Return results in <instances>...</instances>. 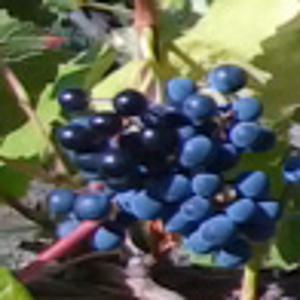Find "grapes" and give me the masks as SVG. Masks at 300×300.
Returning a JSON list of instances; mask_svg holds the SVG:
<instances>
[{
	"label": "grapes",
	"mask_w": 300,
	"mask_h": 300,
	"mask_svg": "<svg viewBox=\"0 0 300 300\" xmlns=\"http://www.w3.org/2000/svg\"><path fill=\"white\" fill-rule=\"evenodd\" d=\"M58 106L65 113H78L89 107L91 98L79 86H67L57 95Z\"/></svg>",
	"instance_id": "obj_4"
},
{
	"label": "grapes",
	"mask_w": 300,
	"mask_h": 300,
	"mask_svg": "<svg viewBox=\"0 0 300 300\" xmlns=\"http://www.w3.org/2000/svg\"><path fill=\"white\" fill-rule=\"evenodd\" d=\"M281 178L288 185L300 183V158L289 157L285 159L282 165Z\"/></svg>",
	"instance_id": "obj_5"
},
{
	"label": "grapes",
	"mask_w": 300,
	"mask_h": 300,
	"mask_svg": "<svg viewBox=\"0 0 300 300\" xmlns=\"http://www.w3.org/2000/svg\"><path fill=\"white\" fill-rule=\"evenodd\" d=\"M197 92L189 77L168 80L165 96L153 102L135 89L120 91L116 114H79L58 127V148L74 153V169L95 190L47 193V210L66 216L56 237L69 239L82 222L106 217L113 202L120 221L162 219L166 230L183 235L187 249L222 268L248 262L250 246L240 234L254 243L270 240L283 205L269 199L267 172L249 169L234 184L221 174L246 153L273 147V132L256 120L264 105L244 98L218 106Z\"/></svg>",
	"instance_id": "obj_1"
},
{
	"label": "grapes",
	"mask_w": 300,
	"mask_h": 300,
	"mask_svg": "<svg viewBox=\"0 0 300 300\" xmlns=\"http://www.w3.org/2000/svg\"><path fill=\"white\" fill-rule=\"evenodd\" d=\"M123 233L118 227L100 223L96 225L94 232L88 238L90 249L96 253H109L121 245Z\"/></svg>",
	"instance_id": "obj_3"
},
{
	"label": "grapes",
	"mask_w": 300,
	"mask_h": 300,
	"mask_svg": "<svg viewBox=\"0 0 300 300\" xmlns=\"http://www.w3.org/2000/svg\"><path fill=\"white\" fill-rule=\"evenodd\" d=\"M246 82L242 68L231 64L213 68L208 78L210 88L220 95L234 94L244 88Z\"/></svg>",
	"instance_id": "obj_2"
}]
</instances>
